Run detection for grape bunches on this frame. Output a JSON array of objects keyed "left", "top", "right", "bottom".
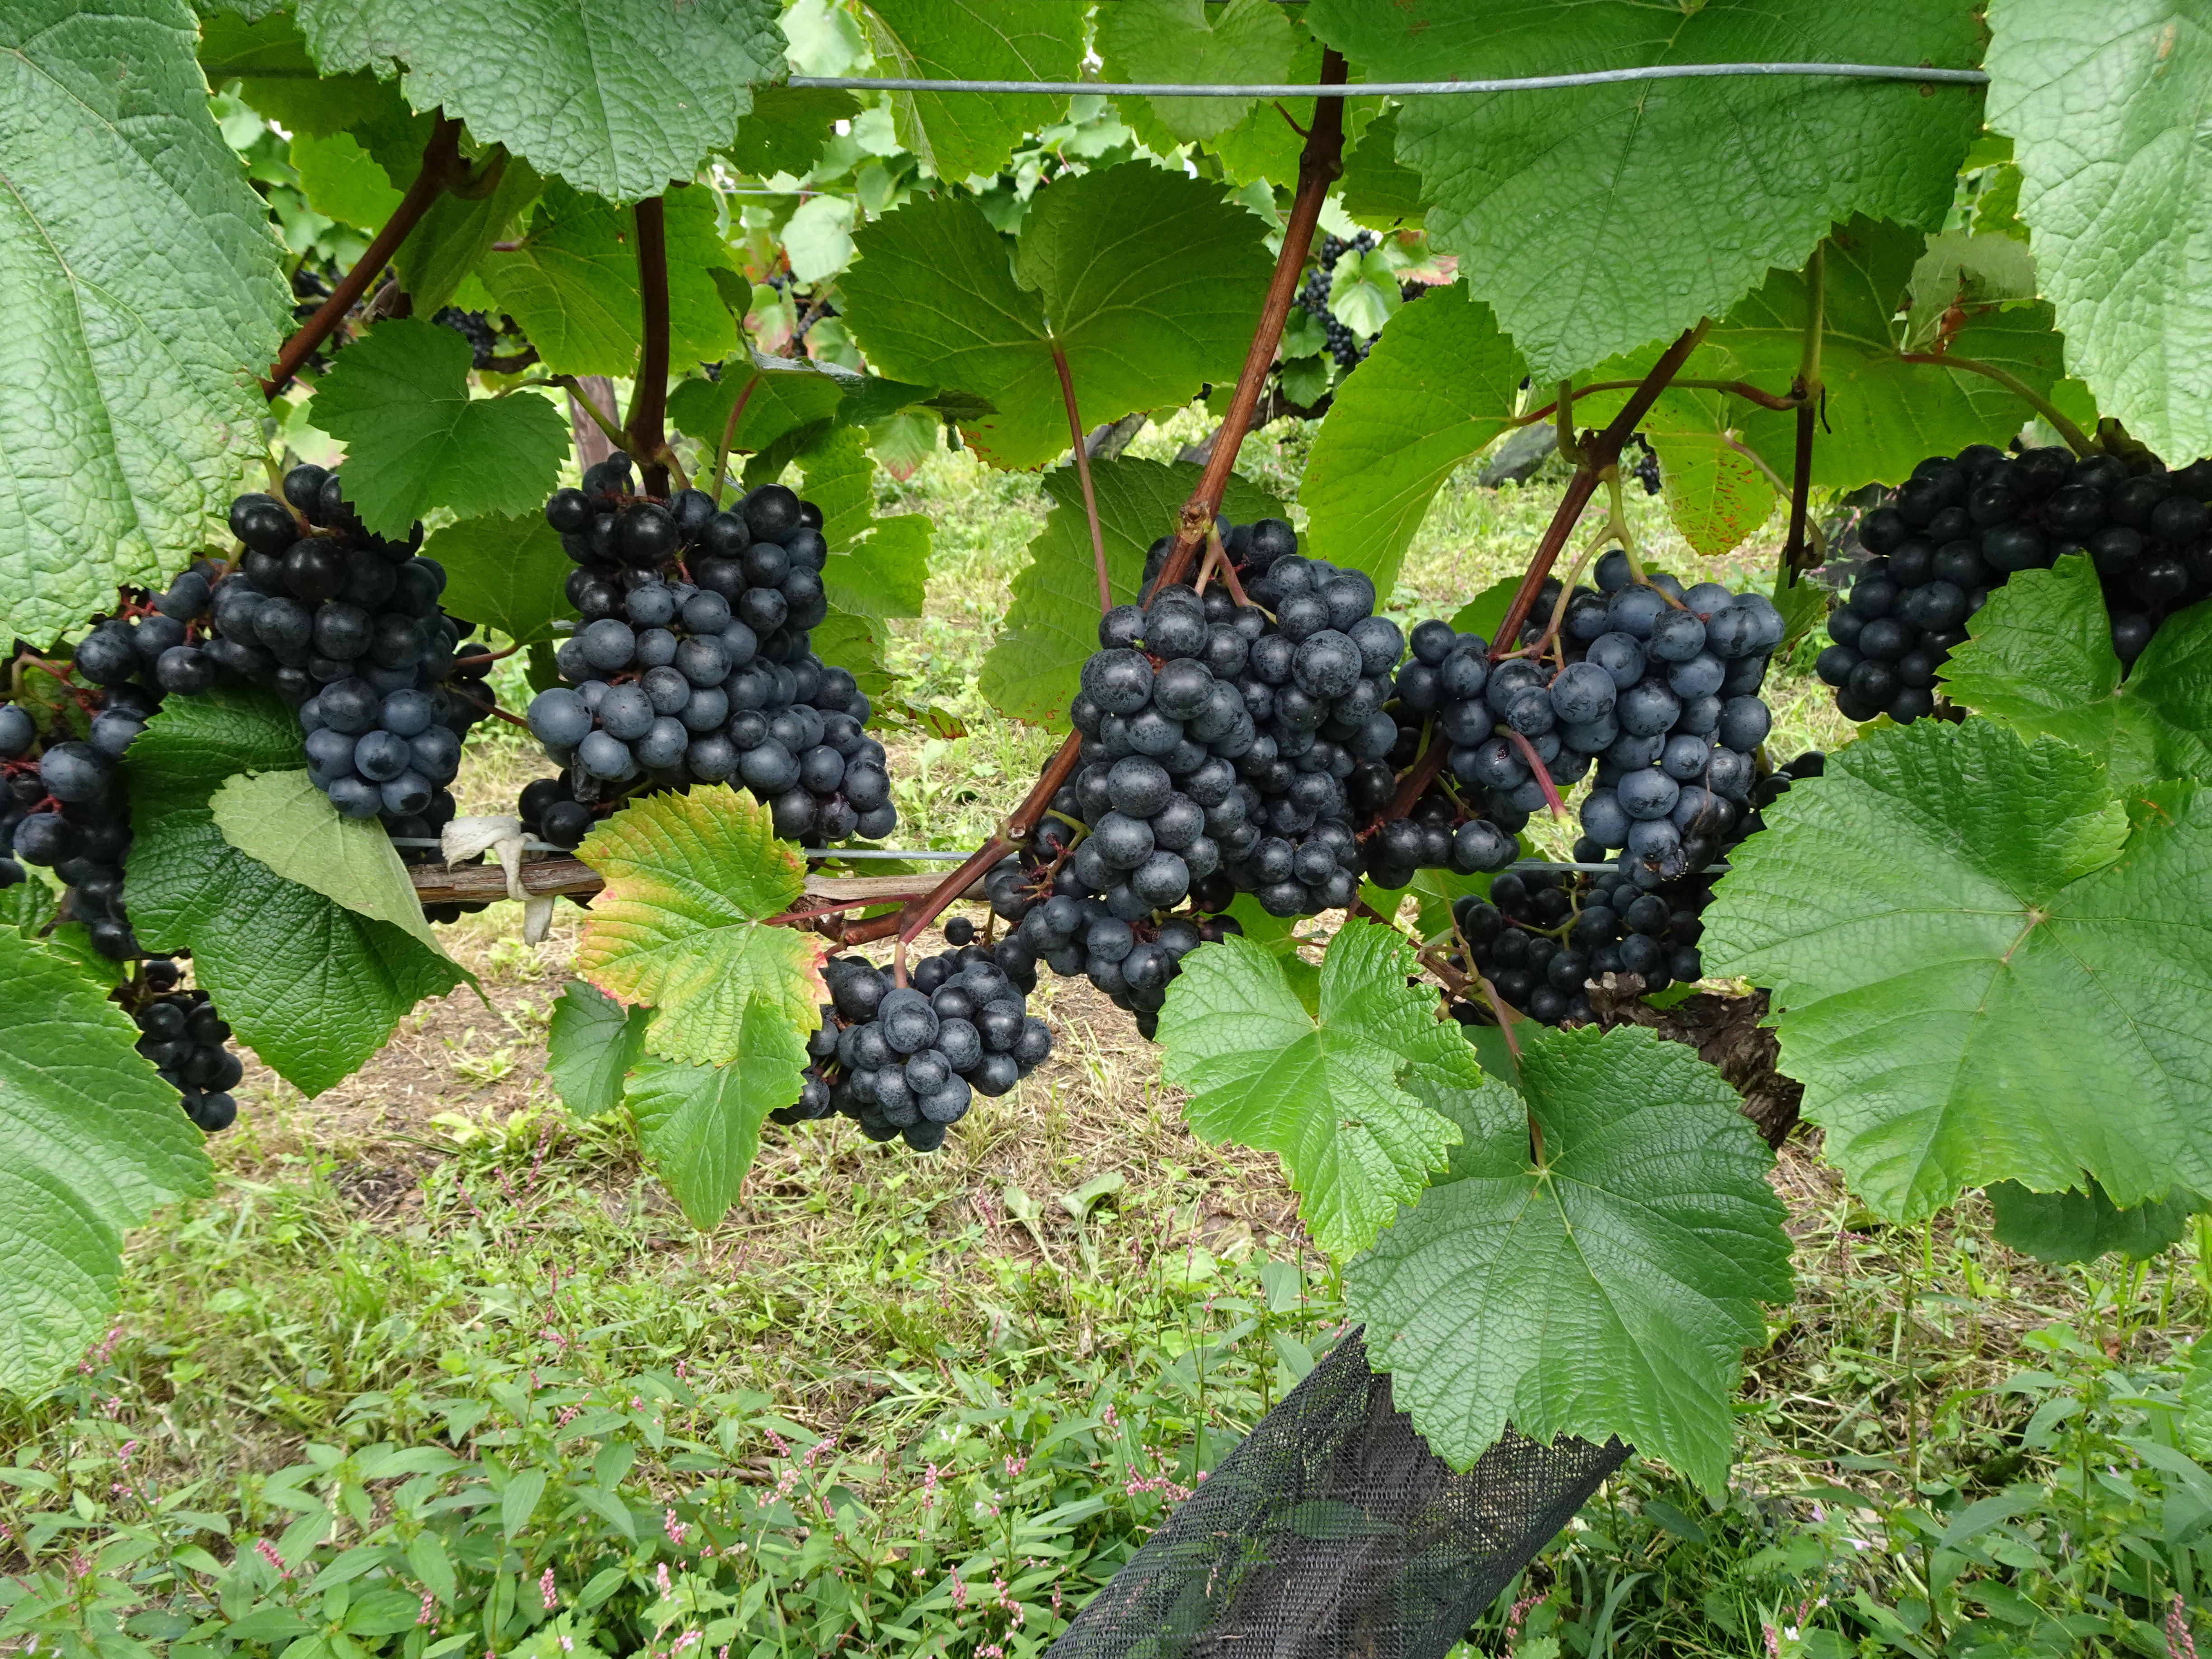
[
  {"left": 375, "top": 788, "right": 490, "bottom": 924},
  {"left": 1138, "top": 514, "right": 1401, "bottom": 917},
  {"left": 1986, "top": 417, "right": 2212, "bottom": 680},
  {"left": 1815, "top": 444, "right": 2014, "bottom": 724},
  {"left": 1087, "top": 867, "right": 1237, "bottom": 1037},
  {"left": 108, "top": 961, "right": 242, "bottom": 1132},
  {"left": 765, "top": 655, "right": 897, "bottom": 872},
  {"left": 985, "top": 752, "right": 1110, "bottom": 974},
  {"left": 93, "top": 559, "right": 222, "bottom": 699},
  {"left": 767, "top": 956, "right": 887, "bottom": 1126},
  {"left": 528, "top": 581, "right": 809, "bottom": 794},
  {"left": 1698, "top": 752, "right": 1829, "bottom": 912},
  {"left": 0, "top": 631, "right": 163, "bottom": 889},
  {"left": 1578, "top": 860, "right": 1705, "bottom": 993},
  {"left": 1516, "top": 549, "right": 1784, "bottom": 886},
  {"left": 1401, "top": 619, "right": 1621, "bottom": 831},
  {"left": 1346, "top": 688, "right": 1529, "bottom": 890},
  {"left": 1450, "top": 835, "right": 1606, "bottom": 1029},
  {"left": 835, "top": 987, "right": 982, "bottom": 1152},
  {"left": 56, "top": 802, "right": 192, "bottom": 960},
  {"left": 680, "top": 484, "right": 827, "bottom": 665},
  {"left": 914, "top": 916, "right": 1052, "bottom": 1096},
  {"left": 547, "top": 451, "right": 716, "bottom": 635},
  {"left": 1074, "top": 578, "right": 1268, "bottom": 919},
  {"left": 206, "top": 465, "right": 495, "bottom": 830},
  {"left": 517, "top": 768, "right": 644, "bottom": 910}
]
